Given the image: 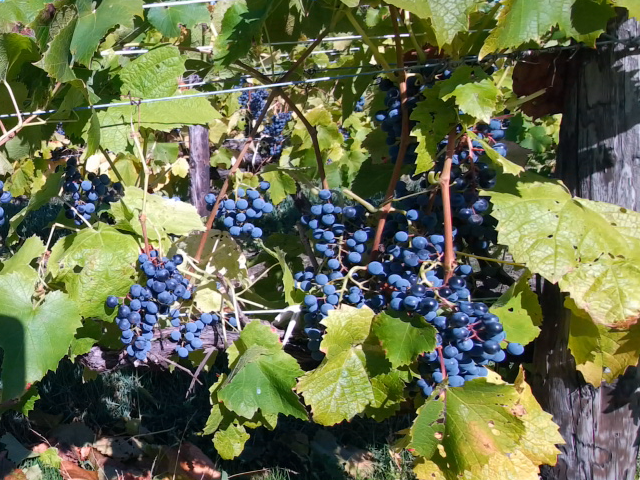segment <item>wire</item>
<instances>
[{
	"instance_id": "wire-4",
	"label": "wire",
	"mask_w": 640,
	"mask_h": 480,
	"mask_svg": "<svg viewBox=\"0 0 640 480\" xmlns=\"http://www.w3.org/2000/svg\"><path fill=\"white\" fill-rule=\"evenodd\" d=\"M55 114L56 113V109L55 108H47L45 110H40V111H30V112H21L20 116L21 117H32V116H43V115H47V114Z\"/></svg>"
},
{
	"instance_id": "wire-3",
	"label": "wire",
	"mask_w": 640,
	"mask_h": 480,
	"mask_svg": "<svg viewBox=\"0 0 640 480\" xmlns=\"http://www.w3.org/2000/svg\"><path fill=\"white\" fill-rule=\"evenodd\" d=\"M283 312L292 313L293 309L290 307H281V308H275V309L249 308V309L243 310L244 314H251V313L278 314Z\"/></svg>"
},
{
	"instance_id": "wire-1",
	"label": "wire",
	"mask_w": 640,
	"mask_h": 480,
	"mask_svg": "<svg viewBox=\"0 0 640 480\" xmlns=\"http://www.w3.org/2000/svg\"><path fill=\"white\" fill-rule=\"evenodd\" d=\"M448 64L447 60L442 61H426L417 64H407L404 66H397L392 68H385L379 70H369L365 72H356L353 74L344 73L340 75H330L326 77H318L313 79H304L298 81H287V82H278V83H267L263 85L257 86H245V87H236V88H223L220 90L202 92V93H185L177 97H162V98H145L141 100H137L134 102H111L106 104H91V105H78L76 107L77 111L80 110H93V109H108L113 107H136L139 105L151 103H164V102H179L188 98H205L210 96L222 95L225 93H238V92H248V91H259L265 90L269 88H280V87H289V86H300L306 84H316L320 82H328L332 80H342V79H355L358 77H368L371 75H382L387 73H394L399 71H406L409 69H420L428 66H445Z\"/></svg>"
},
{
	"instance_id": "wire-2",
	"label": "wire",
	"mask_w": 640,
	"mask_h": 480,
	"mask_svg": "<svg viewBox=\"0 0 640 480\" xmlns=\"http://www.w3.org/2000/svg\"><path fill=\"white\" fill-rule=\"evenodd\" d=\"M211 0H186V1H178V2H156L152 4H143L144 9H154L158 7H180V6H188V5H197V4H205L210 3Z\"/></svg>"
}]
</instances>
